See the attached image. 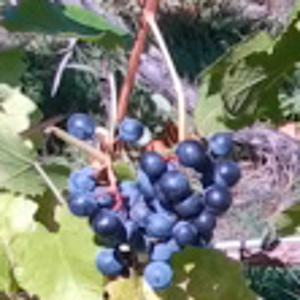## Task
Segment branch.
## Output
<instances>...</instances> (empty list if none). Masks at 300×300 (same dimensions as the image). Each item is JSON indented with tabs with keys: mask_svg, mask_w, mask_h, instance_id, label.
Instances as JSON below:
<instances>
[{
	"mask_svg": "<svg viewBox=\"0 0 300 300\" xmlns=\"http://www.w3.org/2000/svg\"><path fill=\"white\" fill-rule=\"evenodd\" d=\"M155 3L156 0H144L143 10L132 40L129 52V60L127 61L123 71L121 87L119 91V103L116 110V118L119 121H124L127 118L135 72L141 62L142 48L150 27L147 19L149 17H153Z\"/></svg>",
	"mask_w": 300,
	"mask_h": 300,
	"instance_id": "30e6481e",
	"label": "branch"
}]
</instances>
